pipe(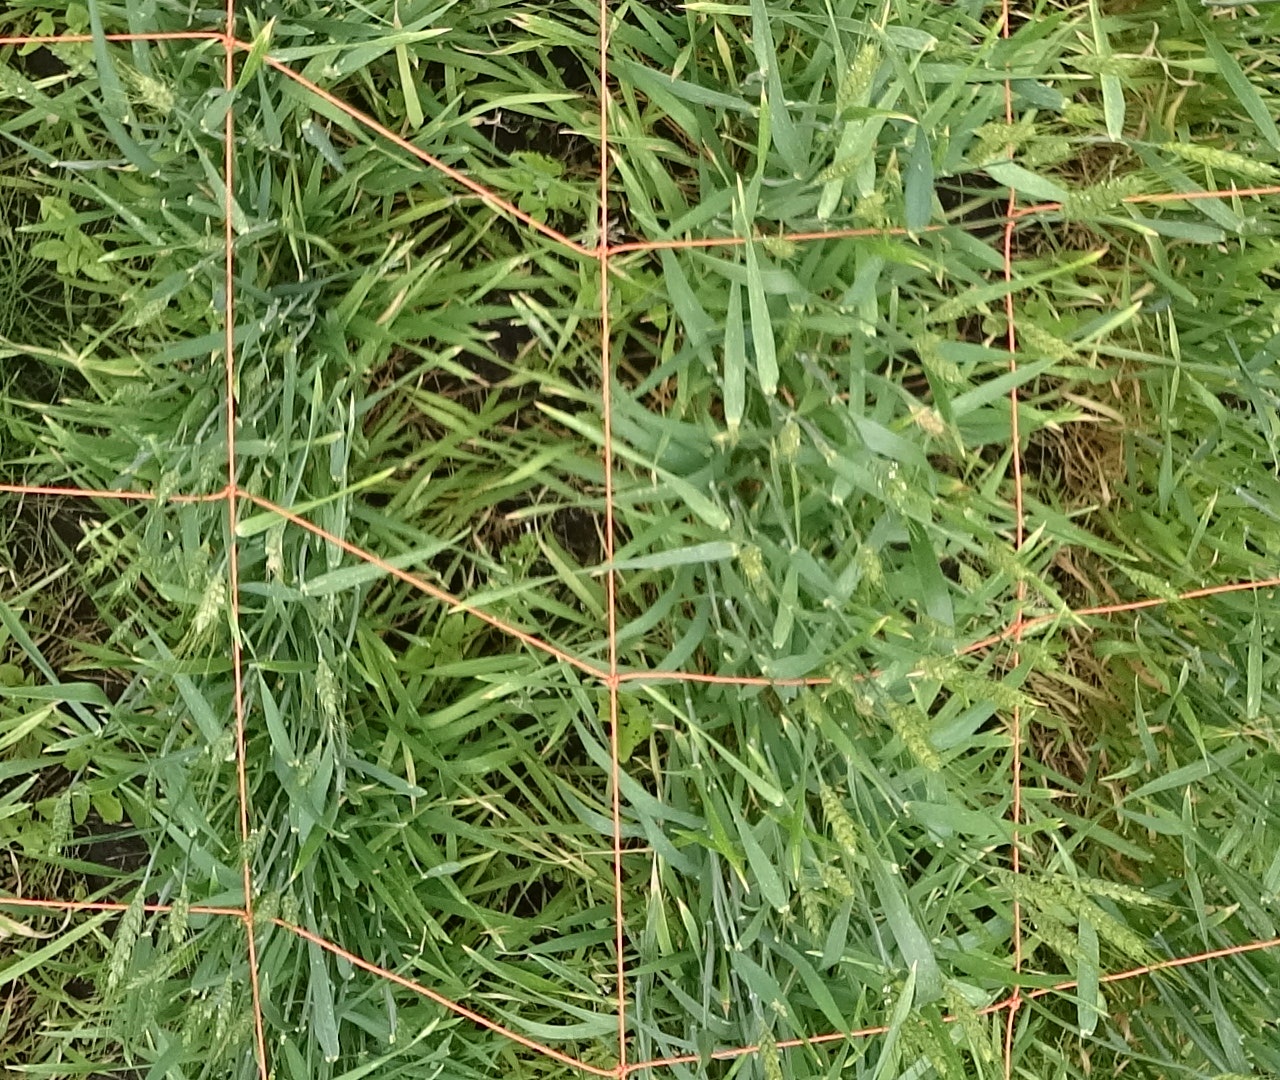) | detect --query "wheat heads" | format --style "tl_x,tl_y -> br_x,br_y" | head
115,558 -> 138,590
281,892 -> 296,929
113,379 -> 146,400
818,858 -> 857,899
831,42 -> 878,110
1156,142 -> 1280,190
123,942 -> 195,994
299,741 -> 320,785
983,858 -> 1058,902
108,891 -> 145,984
851,188 -> 891,222
828,659 -> 874,711
1015,641 -> 1054,670
777,421 -> 800,458
950,670 -> 1026,706
962,124 -> 1007,173
252,888 -> 278,928
167,895 -> 191,944
108,612 -> 133,646
1019,140 -> 1076,171
203,441 -> 224,483
821,785 -> 857,854
45,788 -> 73,847
910,337 -> 969,392
986,538 -> 1028,578
740,540 -> 766,580
197,576 -> 227,623
53,47 -> 99,79
1057,882 -> 1153,959
1127,563 -> 1179,601
793,873 -> 830,939
189,535 -> 212,578
859,537 -> 887,594
889,696 -> 942,771
864,458 -> 909,506
802,685 -> 824,722
213,975 -> 234,1033
0,62 -> 36,104
1059,177 -> 1149,220
977,123 -> 1040,139
311,654 -> 338,716
239,827 -> 261,855
229,1006 -> 255,1045
956,554 -> 982,592
917,300 -> 970,325
137,297 -> 169,327
244,123 -> 269,147
940,889 -> 994,940
812,154 -> 866,192
156,469 -> 182,506
135,76 -> 169,110
140,548 -> 176,567
767,232 -> 799,259
193,236 -> 230,255
140,772 -> 157,813
207,721 -> 235,768
179,1003 -> 205,1039
1027,907 -> 1090,956
1063,100 -> 1104,122
1070,51 -> 1133,74
910,401 -> 944,438
1015,312 -> 1077,358
1078,870 -> 1156,910
780,310 -> 802,356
